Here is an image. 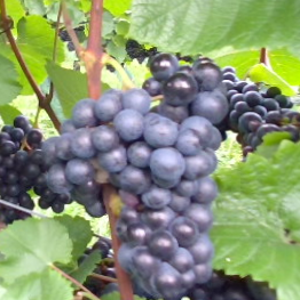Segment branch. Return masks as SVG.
<instances>
[{
  "instance_id": "branch-1",
  "label": "branch",
  "mask_w": 300,
  "mask_h": 300,
  "mask_svg": "<svg viewBox=\"0 0 300 300\" xmlns=\"http://www.w3.org/2000/svg\"><path fill=\"white\" fill-rule=\"evenodd\" d=\"M103 5V0L91 1L90 34L88 36L87 46L83 49L71 23L67 3L65 1L59 3L67 34L78 55L83 60H86L88 64V93L89 96L95 100L101 98L102 89L103 49L101 48V30Z\"/></svg>"
},
{
  "instance_id": "branch-2",
  "label": "branch",
  "mask_w": 300,
  "mask_h": 300,
  "mask_svg": "<svg viewBox=\"0 0 300 300\" xmlns=\"http://www.w3.org/2000/svg\"><path fill=\"white\" fill-rule=\"evenodd\" d=\"M101 190L104 198V207L106 208V214L111 225V237L114 244L115 268L120 300H134L135 293L132 278L126 271L121 269V265L118 262V250L121 245V240L114 234L115 222L118 220V213L121 211V205L120 202H118V193L111 185H103Z\"/></svg>"
},
{
  "instance_id": "branch-3",
  "label": "branch",
  "mask_w": 300,
  "mask_h": 300,
  "mask_svg": "<svg viewBox=\"0 0 300 300\" xmlns=\"http://www.w3.org/2000/svg\"><path fill=\"white\" fill-rule=\"evenodd\" d=\"M10 27H12V21L9 20V16L6 14V4L4 0H0V28H3L5 31L6 37L10 42V48L14 51L19 66L21 67L25 77L28 80L29 85L36 93L37 97L39 98V107L44 109L47 114L49 115L52 123L54 124L55 128L57 129L59 135L62 134L61 123L57 119L54 110L52 109L51 105L48 103L45 95L40 91L39 87L37 86L36 82L32 78V75L27 68V65L22 60L21 53L18 49L16 40L14 35L10 32Z\"/></svg>"
}]
</instances>
